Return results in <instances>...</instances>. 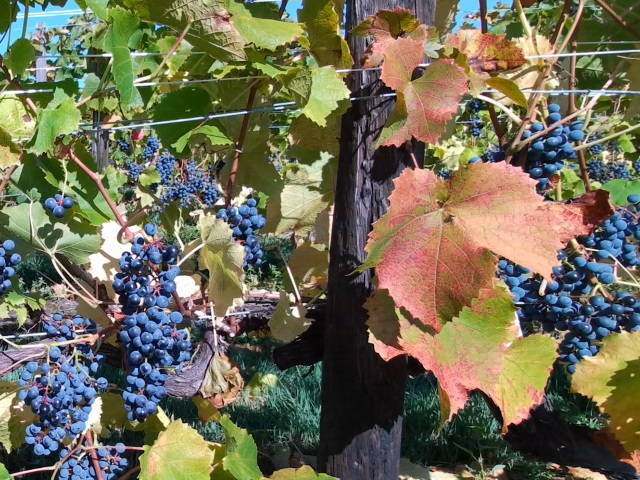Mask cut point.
Segmentation results:
<instances>
[{"mask_svg": "<svg viewBox=\"0 0 640 480\" xmlns=\"http://www.w3.org/2000/svg\"><path fill=\"white\" fill-rule=\"evenodd\" d=\"M133 234H134L135 236H137V235H143V236H144V238H146L147 242H148V243H151V239H150V237H149L145 232H143V231H138V232H134Z\"/></svg>", "mask_w": 640, "mask_h": 480, "instance_id": "7d7e1d6f", "label": "cut point"}, {"mask_svg": "<svg viewBox=\"0 0 640 480\" xmlns=\"http://www.w3.org/2000/svg\"><path fill=\"white\" fill-rule=\"evenodd\" d=\"M65 160H66V155H65V154H63V157H62V167H63V168H64V170H65L64 183H67V180H68V168H67V166L65 165Z\"/></svg>", "mask_w": 640, "mask_h": 480, "instance_id": "6a23745f", "label": "cut point"}, {"mask_svg": "<svg viewBox=\"0 0 640 480\" xmlns=\"http://www.w3.org/2000/svg\"><path fill=\"white\" fill-rule=\"evenodd\" d=\"M535 113H537L540 116V118H541V120L543 122V126H546V120H545V117L542 114V112L540 110L536 109Z\"/></svg>", "mask_w": 640, "mask_h": 480, "instance_id": "deb38ca7", "label": "cut point"}]
</instances>
